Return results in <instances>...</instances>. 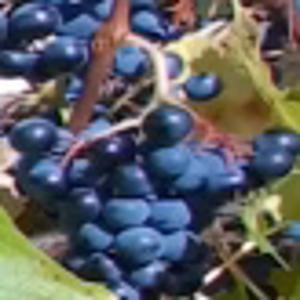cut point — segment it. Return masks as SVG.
Segmentation results:
<instances>
[{
    "label": "cut point",
    "mask_w": 300,
    "mask_h": 300,
    "mask_svg": "<svg viewBox=\"0 0 300 300\" xmlns=\"http://www.w3.org/2000/svg\"><path fill=\"white\" fill-rule=\"evenodd\" d=\"M121 39L126 42L130 43L139 50L148 54L154 64L156 70V101L164 100L167 98H172V96L168 93L167 89V66L166 60L162 52L150 41L145 40L140 35L131 32V31H124L121 34Z\"/></svg>",
    "instance_id": "obj_1"
}]
</instances>
